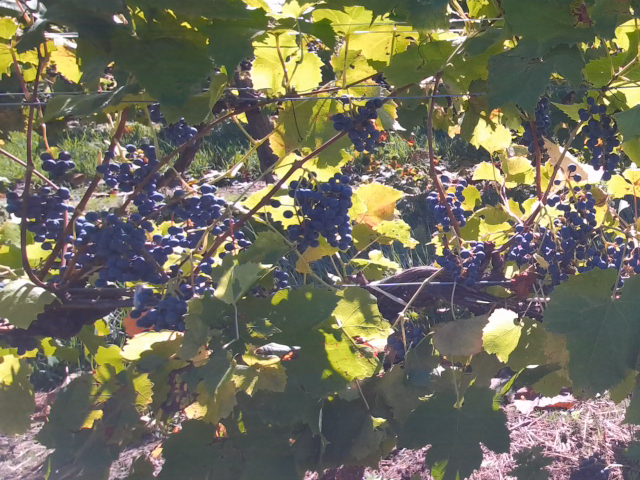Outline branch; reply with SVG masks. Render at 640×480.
<instances>
[{
    "label": "branch",
    "mask_w": 640,
    "mask_h": 480,
    "mask_svg": "<svg viewBox=\"0 0 640 480\" xmlns=\"http://www.w3.org/2000/svg\"><path fill=\"white\" fill-rule=\"evenodd\" d=\"M345 135L344 131L339 132L335 136H333L330 140L325 141L320 144L319 147L314 148L306 157L300 159L299 162L293 161L292 166L289 168L288 172L280 179V182L271 189V192L261 199V202L257 204L255 207L251 209V211L246 214L239 223L232 229H229L225 233H223L219 240L212 246V248L205 254L206 258H210L215 251L221 246L224 242L225 238H228L230 235L236 233L240 230V228L249 220L258 210H260L268 201V199L273 198L277 192L288 182L290 176L294 173L295 170L300 168L302 164H306L309 162L314 155L319 154L323 149H326L333 145L336 141L342 138Z\"/></svg>",
    "instance_id": "branch-3"
},
{
    "label": "branch",
    "mask_w": 640,
    "mask_h": 480,
    "mask_svg": "<svg viewBox=\"0 0 640 480\" xmlns=\"http://www.w3.org/2000/svg\"><path fill=\"white\" fill-rule=\"evenodd\" d=\"M33 110L34 107L29 106L28 107V130H27V135H26V148H27V160H26V167H27V172H26V181H25V188H24V192L22 193V206H21V223H20V233H21V265L23 266V270L25 273H27L29 279L35 283L36 285H38L41 288H45L46 284L43 283L40 280H43L45 278V276L47 275V272L49 271L50 267L52 266V263L54 262V260L56 259L57 255L59 254V252L62 250L63 246L66 243L68 234H70L72 232V223L76 217V214H78L77 209H82L85 210V205L87 203V201L90 199L91 195L93 194L98 182L100 181V178L104 176V174L99 173L98 171H96V173L93 175V178L90 182V184L88 185L87 190L84 192L83 196H82V200L80 201V203L78 204V206H76L74 214L72 216V219L70 220L69 224L67 225V227H64L61 231V235L60 238L58 240V243L55 245V247L52 249L50 255L48 256L47 260L45 261L44 265L42 266V269L40 270L39 274L37 275V278H35V276L33 275L31 266L29 265V259L27 257L26 254V224H27V220H26V208H27V198L29 196V191H30V183H31V175H32V171L36 169V165L32 163V145H31V137H32V132H33Z\"/></svg>",
    "instance_id": "branch-1"
},
{
    "label": "branch",
    "mask_w": 640,
    "mask_h": 480,
    "mask_svg": "<svg viewBox=\"0 0 640 480\" xmlns=\"http://www.w3.org/2000/svg\"><path fill=\"white\" fill-rule=\"evenodd\" d=\"M199 271H200V268L196 267L194 269V271L192 272L191 276L186 279V283L190 284L196 278V276L198 275Z\"/></svg>",
    "instance_id": "branch-14"
},
{
    "label": "branch",
    "mask_w": 640,
    "mask_h": 480,
    "mask_svg": "<svg viewBox=\"0 0 640 480\" xmlns=\"http://www.w3.org/2000/svg\"><path fill=\"white\" fill-rule=\"evenodd\" d=\"M411 87H413V83H410V84L406 85V86H405V87H403V88H399V89H397V90H395V91L391 92L389 95H395V96H398L400 93H402V92H403V91H405V90H408V89H409V88H411Z\"/></svg>",
    "instance_id": "branch-13"
},
{
    "label": "branch",
    "mask_w": 640,
    "mask_h": 480,
    "mask_svg": "<svg viewBox=\"0 0 640 480\" xmlns=\"http://www.w3.org/2000/svg\"><path fill=\"white\" fill-rule=\"evenodd\" d=\"M640 59V55L636 54L633 58H631L628 63H626L625 65H623L621 68H619L614 74H612L608 80L603 84V86L600 88V90L597 92V95L595 97L594 103L595 104H599L600 103V99L603 95V93L606 91V89L611 85V83L613 82V80H615L618 76H620L622 73L626 72L629 68L632 67V65L638 61Z\"/></svg>",
    "instance_id": "branch-6"
},
{
    "label": "branch",
    "mask_w": 640,
    "mask_h": 480,
    "mask_svg": "<svg viewBox=\"0 0 640 480\" xmlns=\"http://www.w3.org/2000/svg\"><path fill=\"white\" fill-rule=\"evenodd\" d=\"M37 51V67L35 70V74L33 77V94L31 95V101L36 102V97H37V92H38V82H39V76H40V72L42 69V48L41 47H37L36 48Z\"/></svg>",
    "instance_id": "branch-8"
},
{
    "label": "branch",
    "mask_w": 640,
    "mask_h": 480,
    "mask_svg": "<svg viewBox=\"0 0 640 480\" xmlns=\"http://www.w3.org/2000/svg\"><path fill=\"white\" fill-rule=\"evenodd\" d=\"M380 75H381V71L377 70L375 73L368 74V75H365V76H362V77H359V78L353 80L352 82H350V83H348L346 85V88L350 89V88L354 87L355 84H359V83H362V82L370 80V79H375Z\"/></svg>",
    "instance_id": "branch-11"
},
{
    "label": "branch",
    "mask_w": 640,
    "mask_h": 480,
    "mask_svg": "<svg viewBox=\"0 0 640 480\" xmlns=\"http://www.w3.org/2000/svg\"><path fill=\"white\" fill-rule=\"evenodd\" d=\"M530 125H531V130H532V140H533V145H534V150L536 152V177H535V186L537 189V200H538V206L535 207V209L533 210V212L530 214L529 218L526 220L525 225L529 226L534 218L537 216V214L540 212V210L543 208V206L546 204L547 199H548V195L549 192L552 189L553 183L556 179V174L560 168V166L562 165V162L565 159V156L568 154V152L570 151L576 134L578 133V130L580 129V127L582 126V122L578 121L572 132L570 135V138L567 142L566 147L564 148V150L562 151V153L560 154L559 157V161H557L555 163V166L553 167L552 171H551V176L549 178L548 184L543 192V196H542V187L540 184V179H541V163H542V157H541V149L539 147V143H538V138H537V127H536V123L534 120L530 121Z\"/></svg>",
    "instance_id": "branch-2"
},
{
    "label": "branch",
    "mask_w": 640,
    "mask_h": 480,
    "mask_svg": "<svg viewBox=\"0 0 640 480\" xmlns=\"http://www.w3.org/2000/svg\"><path fill=\"white\" fill-rule=\"evenodd\" d=\"M442 76L441 72H438L435 76V81H434V87L432 90V93H438V89H439V83H440V78Z\"/></svg>",
    "instance_id": "branch-12"
},
{
    "label": "branch",
    "mask_w": 640,
    "mask_h": 480,
    "mask_svg": "<svg viewBox=\"0 0 640 480\" xmlns=\"http://www.w3.org/2000/svg\"><path fill=\"white\" fill-rule=\"evenodd\" d=\"M434 104H435V98L430 99V102H429V105H428L427 111H426L427 143H428L429 169H430L429 173H430V178L432 179L434 185L436 186L438 192L440 193V199H441L442 206H443L444 209L447 210L449 223H450L451 226L454 227V230L456 232V236L460 237L461 236V231H460L459 224L454 221L452 208L448 205V203L446 201V196H445L444 189H443L442 185L440 184V182L437 179V175H436L435 167H434V151H433L432 127H431V113H432V109L434 107Z\"/></svg>",
    "instance_id": "branch-5"
},
{
    "label": "branch",
    "mask_w": 640,
    "mask_h": 480,
    "mask_svg": "<svg viewBox=\"0 0 640 480\" xmlns=\"http://www.w3.org/2000/svg\"><path fill=\"white\" fill-rule=\"evenodd\" d=\"M84 250H85V247L84 246H80L77 250L74 251V253H73V255H72L71 259H70L69 265H68L66 271L64 272V275L62 276V279H61L62 283H65L67 281L70 273L72 272V269L74 267L76 259L78 258L79 254L82 253Z\"/></svg>",
    "instance_id": "branch-10"
},
{
    "label": "branch",
    "mask_w": 640,
    "mask_h": 480,
    "mask_svg": "<svg viewBox=\"0 0 640 480\" xmlns=\"http://www.w3.org/2000/svg\"><path fill=\"white\" fill-rule=\"evenodd\" d=\"M129 113H130V109L128 107H125L122 110V113H121V116H120V119H119V122H118V125H117V128H116V132L113 134V136L111 138V142H110V144L108 146V149L110 151H114L116 149V146L118 144L120 136L123 134V130H124V127L126 125Z\"/></svg>",
    "instance_id": "branch-7"
},
{
    "label": "branch",
    "mask_w": 640,
    "mask_h": 480,
    "mask_svg": "<svg viewBox=\"0 0 640 480\" xmlns=\"http://www.w3.org/2000/svg\"><path fill=\"white\" fill-rule=\"evenodd\" d=\"M341 86L340 85H335V86H326L323 89H313V90H307V91H303V92H289L288 96H309V95H315V94H319V93H325V92H329V91H337L340 90Z\"/></svg>",
    "instance_id": "branch-9"
},
{
    "label": "branch",
    "mask_w": 640,
    "mask_h": 480,
    "mask_svg": "<svg viewBox=\"0 0 640 480\" xmlns=\"http://www.w3.org/2000/svg\"><path fill=\"white\" fill-rule=\"evenodd\" d=\"M267 105H268L267 101H259L257 103H254L251 106H243V107H240V108H238L236 110H232V111L226 112L224 115L218 116L216 119L212 120L211 123L208 126L199 129L198 132L194 136H192L191 138H188L187 140H184L174 151H172V152L168 153L166 156L162 157L161 160H159L157 162V164L148 172V174L137 184V186L132 189V191L129 193V195L126 198V200L123 203V205L116 212V216L117 217L121 216V214L129 206V204H130L131 200L134 198L135 194L139 192V190L142 188V186H144L149 181V179L153 176V174L162 165H165L170 158L178 155L184 149V147H186L190 143L195 142L198 138H200L202 136V134H204V133L210 131L211 129H213L214 126L216 124H218L220 121L226 120L231 116L241 114V113H243L245 111H253V110H256L259 107L267 106Z\"/></svg>",
    "instance_id": "branch-4"
}]
</instances>
